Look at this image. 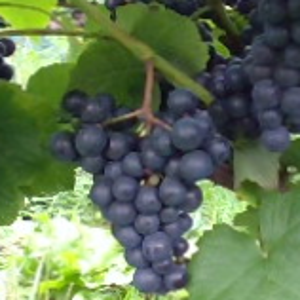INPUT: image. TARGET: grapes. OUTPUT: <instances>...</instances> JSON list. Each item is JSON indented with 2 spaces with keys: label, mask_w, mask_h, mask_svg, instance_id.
<instances>
[{
  "label": "grapes",
  "mask_w": 300,
  "mask_h": 300,
  "mask_svg": "<svg viewBox=\"0 0 300 300\" xmlns=\"http://www.w3.org/2000/svg\"><path fill=\"white\" fill-rule=\"evenodd\" d=\"M230 57L212 55L191 78L216 97L208 104L174 88L165 112L142 116L115 93L75 89L60 99L63 112L85 120L57 129L50 147L61 161L78 160L95 180L89 198L125 248L137 290L169 293L188 282L173 257L189 250L182 236L187 213L203 199L195 184L229 160L242 134L262 139L272 153L290 149L300 132V21L281 14Z\"/></svg>",
  "instance_id": "1"
}]
</instances>
